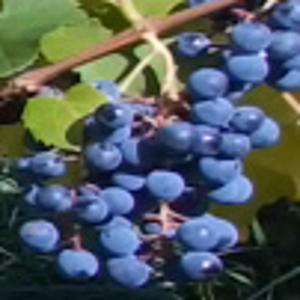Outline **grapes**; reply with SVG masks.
Segmentation results:
<instances>
[{
	"label": "grapes",
	"mask_w": 300,
	"mask_h": 300,
	"mask_svg": "<svg viewBox=\"0 0 300 300\" xmlns=\"http://www.w3.org/2000/svg\"><path fill=\"white\" fill-rule=\"evenodd\" d=\"M230 47L219 66H199L185 84L132 95L110 80L89 84L109 100L82 124V165L89 180L28 184L21 203L44 216L69 212L96 229L95 246L119 286L147 288L152 268L139 256L153 238L175 236L185 249L181 278L210 284L224 274L219 252L234 249L240 230L213 204L243 206L256 185L246 176L252 153L266 152L283 137L279 121L254 103H240L254 88L300 90V0H282L266 22L242 17L226 30Z\"/></svg>",
	"instance_id": "grapes-1"
},
{
	"label": "grapes",
	"mask_w": 300,
	"mask_h": 300,
	"mask_svg": "<svg viewBox=\"0 0 300 300\" xmlns=\"http://www.w3.org/2000/svg\"><path fill=\"white\" fill-rule=\"evenodd\" d=\"M24 140V146L34 153L14 160L13 169L17 175L32 176L38 181H60L68 174L67 160L41 140L34 143L29 129L24 131Z\"/></svg>",
	"instance_id": "grapes-2"
},
{
	"label": "grapes",
	"mask_w": 300,
	"mask_h": 300,
	"mask_svg": "<svg viewBox=\"0 0 300 300\" xmlns=\"http://www.w3.org/2000/svg\"><path fill=\"white\" fill-rule=\"evenodd\" d=\"M51 269L63 281L92 283L101 277L103 261L87 249L62 248L56 252Z\"/></svg>",
	"instance_id": "grapes-3"
},
{
	"label": "grapes",
	"mask_w": 300,
	"mask_h": 300,
	"mask_svg": "<svg viewBox=\"0 0 300 300\" xmlns=\"http://www.w3.org/2000/svg\"><path fill=\"white\" fill-rule=\"evenodd\" d=\"M16 237L25 249L37 254H49L61 243L62 231L52 219L34 217L17 226Z\"/></svg>",
	"instance_id": "grapes-4"
},
{
	"label": "grapes",
	"mask_w": 300,
	"mask_h": 300,
	"mask_svg": "<svg viewBox=\"0 0 300 300\" xmlns=\"http://www.w3.org/2000/svg\"><path fill=\"white\" fill-rule=\"evenodd\" d=\"M213 46V41L208 32L183 31L177 34L174 48L177 55L187 60H199L206 57Z\"/></svg>",
	"instance_id": "grapes-5"
}]
</instances>
